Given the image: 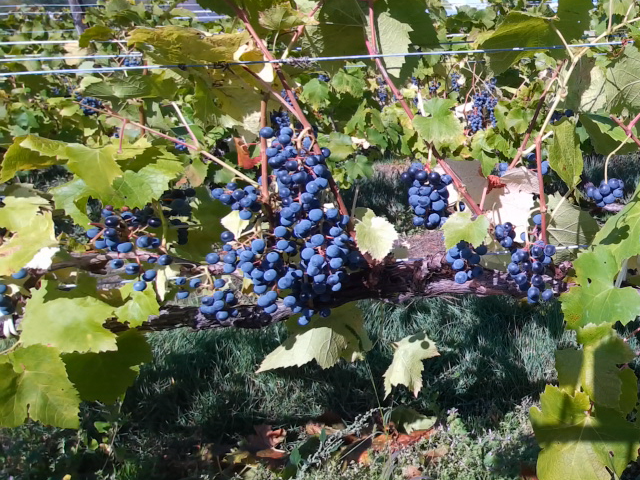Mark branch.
<instances>
[{"label": "branch", "instance_id": "obj_1", "mask_svg": "<svg viewBox=\"0 0 640 480\" xmlns=\"http://www.w3.org/2000/svg\"><path fill=\"white\" fill-rule=\"evenodd\" d=\"M590 51V48H584L580 53H578L574 59L572 60V63L569 67V70L565 76V79L563 80V82L561 83V85L559 86L558 90H557V96L555 97L554 101L551 103V106L549 108L548 114L546 116V119L542 125V127L540 128L539 132L537 133V137H536V157H537V164H536V174H537V179L539 180V201H540V205H539V212L541 214V238L543 240L544 244H548L549 240L546 236V211L544 210L545 206H546V201L544 199V179L542 176V155H541V138L544 134V132L546 131L552 117L554 114V110L557 106V104L559 103V101L561 100L562 96H563V91L565 89V87L567 86L568 82L570 81L575 67L578 63V61L584 57L588 52Z\"/></svg>", "mask_w": 640, "mask_h": 480}, {"label": "branch", "instance_id": "obj_2", "mask_svg": "<svg viewBox=\"0 0 640 480\" xmlns=\"http://www.w3.org/2000/svg\"><path fill=\"white\" fill-rule=\"evenodd\" d=\"M76 105L85 106L86 108L91 109L93 111L100 112V113H105V114L117 117L119 119H122L123 121L130 122L131 124H133V125H135V126L140 128V138H146V131H148V132H151V133H153L155 135H158L159 137H162L164 139H169V140L175 141L176 143H178V144H180V145H182L184 147L195 149L196 151L207 155L210 159H212V160L216 161L217 163H219L221 166L226 168L230 173H233V174L239 176L242 180H244L245 182H247L251 186L256 187L257 189H260V185H258V183L255 180H253L252 178H250L247 175H245L241 170H239L237 168H234L232 166H229V164H227L226 161H221L219 158L214 157L211 153H209V152H207V151H205V150H203L201 148H198L197 146L186 144V143L182 142L181 140H179V139H177L175 137L166 136L165 134H162L161 132H157L154 129L146 127V124H147L146 113H145V108L143 107V105L139 106V123L133 121L130 118H125L124 116H121L119 114H116V113H113V112H110V111H107V110H102V109L95 108L94 106H91V105H89L87 103H82V102L76 101Z\"/></svg>", "mask_w": 640, "mask_h": 480}, {"label": "branch", "instance_id": "obj_3", "mask_svg": "<svg viewBox=\"0 0 640 480\" xmlns=\"http://www.w3.org/2000/svg\"><path fill=\"white\" fill-rule=\"evenodd\" d=\"M283 66H284V63L278 64V65H272V68H273V71H274L273 72V76L279 78V81L281 83V86L283 88V91H284L289 103L291 104V106L295 110V114L297 115L299 121L301 122V124L305 128L304 134L306 136H308V138L310 139L312 150L315 153H318L320 151V146H319L317 137L313 133V127L309 123L307 118L305 117L304 113L302 112V109H301L300 105L298 104L297 100L295 99V97H294V95H293V93L291 91V88H290V86L288 84L286 76L284 75V72L281 69Z\"/></svg>", "mask_w": 640, "mask_h": 480}, {"label": "branch", "instance_id": "obj_4", "mask_svg": "<svg viewBox=\"0 0 640 480\" xmlns=\"http://www.w3.org/2000/svg\"><path fill=\"white\" fill-rule=\"evenodd\" d=\"M260 144L261 153H260V170H261V196L260 201L264 205L265 215L267 218V232L272 234L275 230L276 223L274 222V216L272 212L271 205V197L268 195V185H269V175L267 168V156H268V145L267 140L265 138H260L258 140Z\"/></svg>", "mask_w": 640, "mask_h": 480}, {"label": "branch", "instance_id": "obj_5", "mask_svg": "<svg viewBox=\"0 0 640 480\" xmlns=\"http://www.w3.org/2000/svg\"><path fill=\"white\" fill-rule=\"evenodd\" d=\"M568 59L564 58L559 65L556 67V69L554 70L553 74L551 75V77L549 78L548 82L546 83V86L544 88V90L542 91V94L539 98V100L537 101L533 116L531 118V121L528 125L527 128V132L525 135V138L523 139V141L520 143V145L518 146V153L517 155L513 158V160L509 163L508 165V170L512 171L514 166L516 165V163L522 158L524 152H525V146L526 144L529 142L530 138H531V134L533 131V128L535 126V123L537 121L538 115L540 113V108L543 104V102L545 101V98L547 96V93L549 92L551 86L553 85V82L555 81V79L558 77L559 72L563 69V67L567 64Z\"/></svg>", "mask_w": 640, "mask_h": 480}, {"label": "branch", "instance_id": "obj_6", "mask_svg": "<svg viewBox=\"0 0 640 480\" xmlns=\"http://www.w3.org/2000/svg\"><path fill=\"white\" fill-rule=\"evenodd\" d=\"M424 145L426 147H428V151L432 153V155L435 157L436 161L438 164H440V166L442 167V169L449 174V176L451 177V180L453 182V184L455 185V188L458 190V193L461 196H464L466 198V200L468 201V203L472 206V208L474 209V211L476 212V214L478 216L482 215V210L479 208V206L477 205V203L473 200V198L468 194V190L465 188V186L459 181L457 180L456 174L452 171L451 167L449 166L448 163H446L444 160H442L440 154L437 152V150L435 149V145L432 141H428L425 140L424 141Z\"/></svg>", "mask_w": 640, "mask_h": 480}, {"label": "branch", "instance_id": "obj_7", "mask_svg": "<svg viewBox=\"0 0 640 480\" xmlns=\"http://www.w3.org/2000/svg\"><path fill=\"white\" fill-rule=\"evenodd\" d=\"M231 7L237 12L239 17L241 18V20L243 21V24L245 26L247 34L257 44L258 48L262 51V53L264 54L265 58L267 60H272L273 59L272 53L270 52L268 47L264 44L262 39L254 32L252 24L250 22V19H249L248 15L246 14V12L241 8V6L236 1H233L231 3Z\"/></svg>", "mask_w": 640, "mask_h": 480}, {"label": "branch", "instance_id": "obj_8", "mask_svg": "<svg viewBox=\"0 0 640 480\" xmlns=\"http://www.w3.org/2000/svg\"><path fill=\"white\" fill-rule=\"evenodd\" d=\"M376 64L382 74V77L384 79V82L386 83V85L391 89V92L393 93L394 96L397 97L398 101L400 102V104L402 105V107L405 109L407 116L409 117L410 120L414 119V115L412 113L411 108L409 107V105L406 103V101L404 100L403 96L401 95L400 92H398L396 90V84L393 82V80L388 76L387 71L385 70V67L381 61V59H375Z\"/></svg>", "mask_w": 640, "mask_h": 480}, {"label": "branch", "instance_id": "obj_9", "mask_svg": "<svg viewBox=\"0 0 640 480\" xmlns=\"http://www.w3.org/2000/svg\"><path fill=\"white\" fill-rule=\"evenodd\" d=\"M373 7H374V1L370 0L368 4V17H369V28H370V35H371V45H372L373 54H378V47L376 43V33H375V26H374Z\"/></svg>", "mask_w": 640, "mask_h": 480}, {"label": "branch", "instance_id": "obj_10", "mask_svg": "<svg viewBox=\"0 0 640 480\" xmlns=\"http://www.w3.org/2000/svg\"><path fill=\"white\" fill-rule=\"evenodd\" d=\"M637 21H638V18H637V17H633V18L627 19V20H625L624 22H622L621 24L614 25L613 27H611V28H609V29H606V30H605L604 32H602L601 34H598V35L594 36V37L591 39V42H592V43H595L596 41H599L600 39H603V38H604V37H606L607 35H609V34H611V33H614L615 31H617V30H619V29H623V28H625L626 26H628V25H630V24H632V23H635V22H637Z\"/></svg>", "mask_w": 640, "mask_h": 480}, {"label": "branch", "instance_id": "obj_11", "mask_svg": "<svg viewBox=\"0 0 640 480\" xmlns=\"http://www.w3.org/2000/svg\"><path fill=\"white\" fill-rule=\"evenodd\" d=\"M328 185H329V188H330V192H331V194H332V197L334 198V201L336 202V204H337V206H338L339 211H340L342 214H345V213L347 212V208L345 207V203H344V201L342 200V198H341V196H340V194H339V192H338V189H337V186H336L335 180H334L333 178H330V179L328 180Z\"/></svg>", "mask_w": 640, "mask_h": 480}, {"label": "branch", "instance_id": "obj_12", "mask_svg": "<svg viewBox=\"0 0 640 480\" xmlns=\"http://www.w3.org/2000/svg\"><path fill=\"white\" fill-rule=\"evenodd\" d=\"M303 29H304V25H303V24H300V25L297 27V29L294 31V35L291 37V40H290V42H289V44H288L287 48L284 50V52H283V54H282V57H283V58H286V57L289 55L290 51H291V50H292V48L294 47V44H295V42H296L297 38H299V37H301V36H303V35H304Z\"/></svg>", "mask_w": 640, "mask_h": 480}, {"label": "branch", "instance_id": "obj_13", "mask_svg": "<svg viewBox=\"0 0 640 480\" xmlns=\"http://www.w3.org/2000/svg\"><path fill=\"white\" fill-rule=\"evenodd\" d=\"M612 120L615 121L616 123H618L620 125V128L622 130H624V132L627 133V135L629 137H631L634 141H636L638 146H640V139H638L633 133L630 132L629 128L627 127V125H625V123H623L622 121L618 120L615 117V115H612Z\"/></svg>", "mask_w": 640, "mask_h": 480}]
</instances>
